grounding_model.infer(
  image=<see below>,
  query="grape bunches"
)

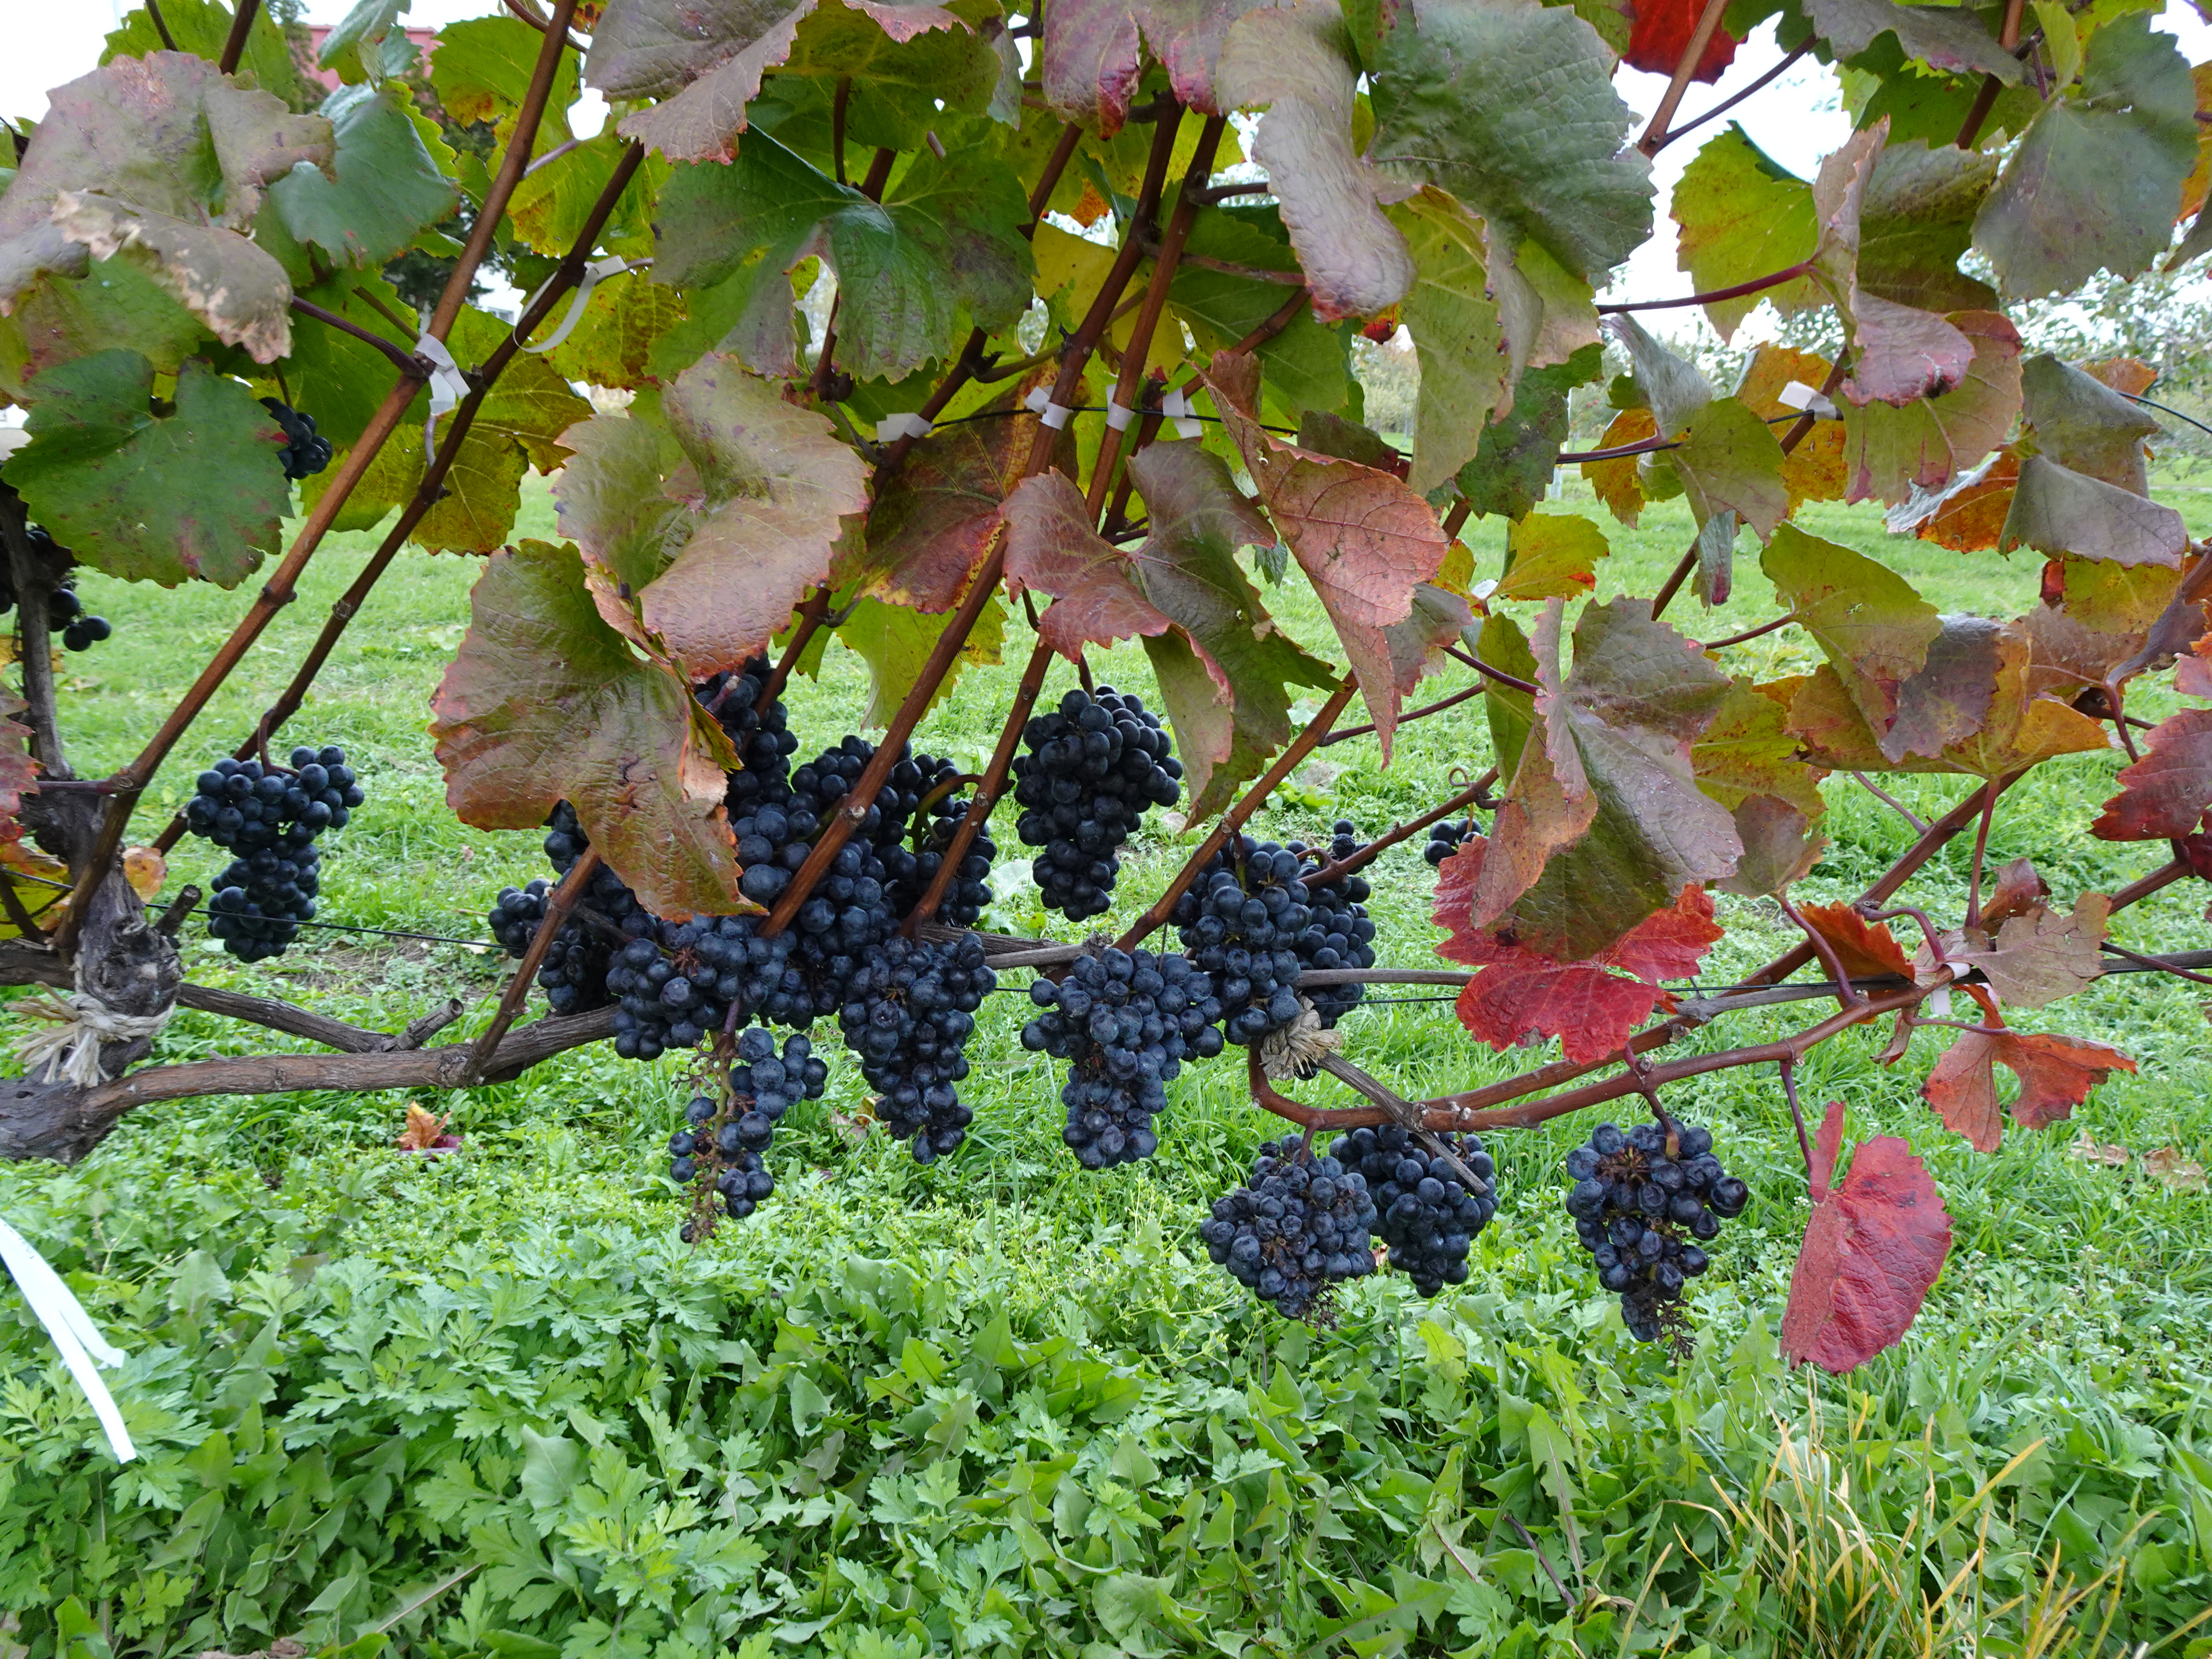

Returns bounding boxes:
[1167,831,1311,1046]
[148,396,178,421]
[758,949,841,1029]
[538,797,627,903]
[1328,1122,1501,1298]
[1566,1119,1748,1343]
[689,649,799,826]
[488,877,621,1016]
[187,745,364,963]
[839,930,999,1164]
[1020,948,1224,1168]
[0,467,111,650]
[1009,686,1183,921]
[1424,818,1483,867]
[883,754,998,924]
[668,1028,828,1241]
[605,801,899,1060]
[1298,819,1375,1023]
[246,398,333,484]
[1197,1136,1378,1321]
[791,729,913,846]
